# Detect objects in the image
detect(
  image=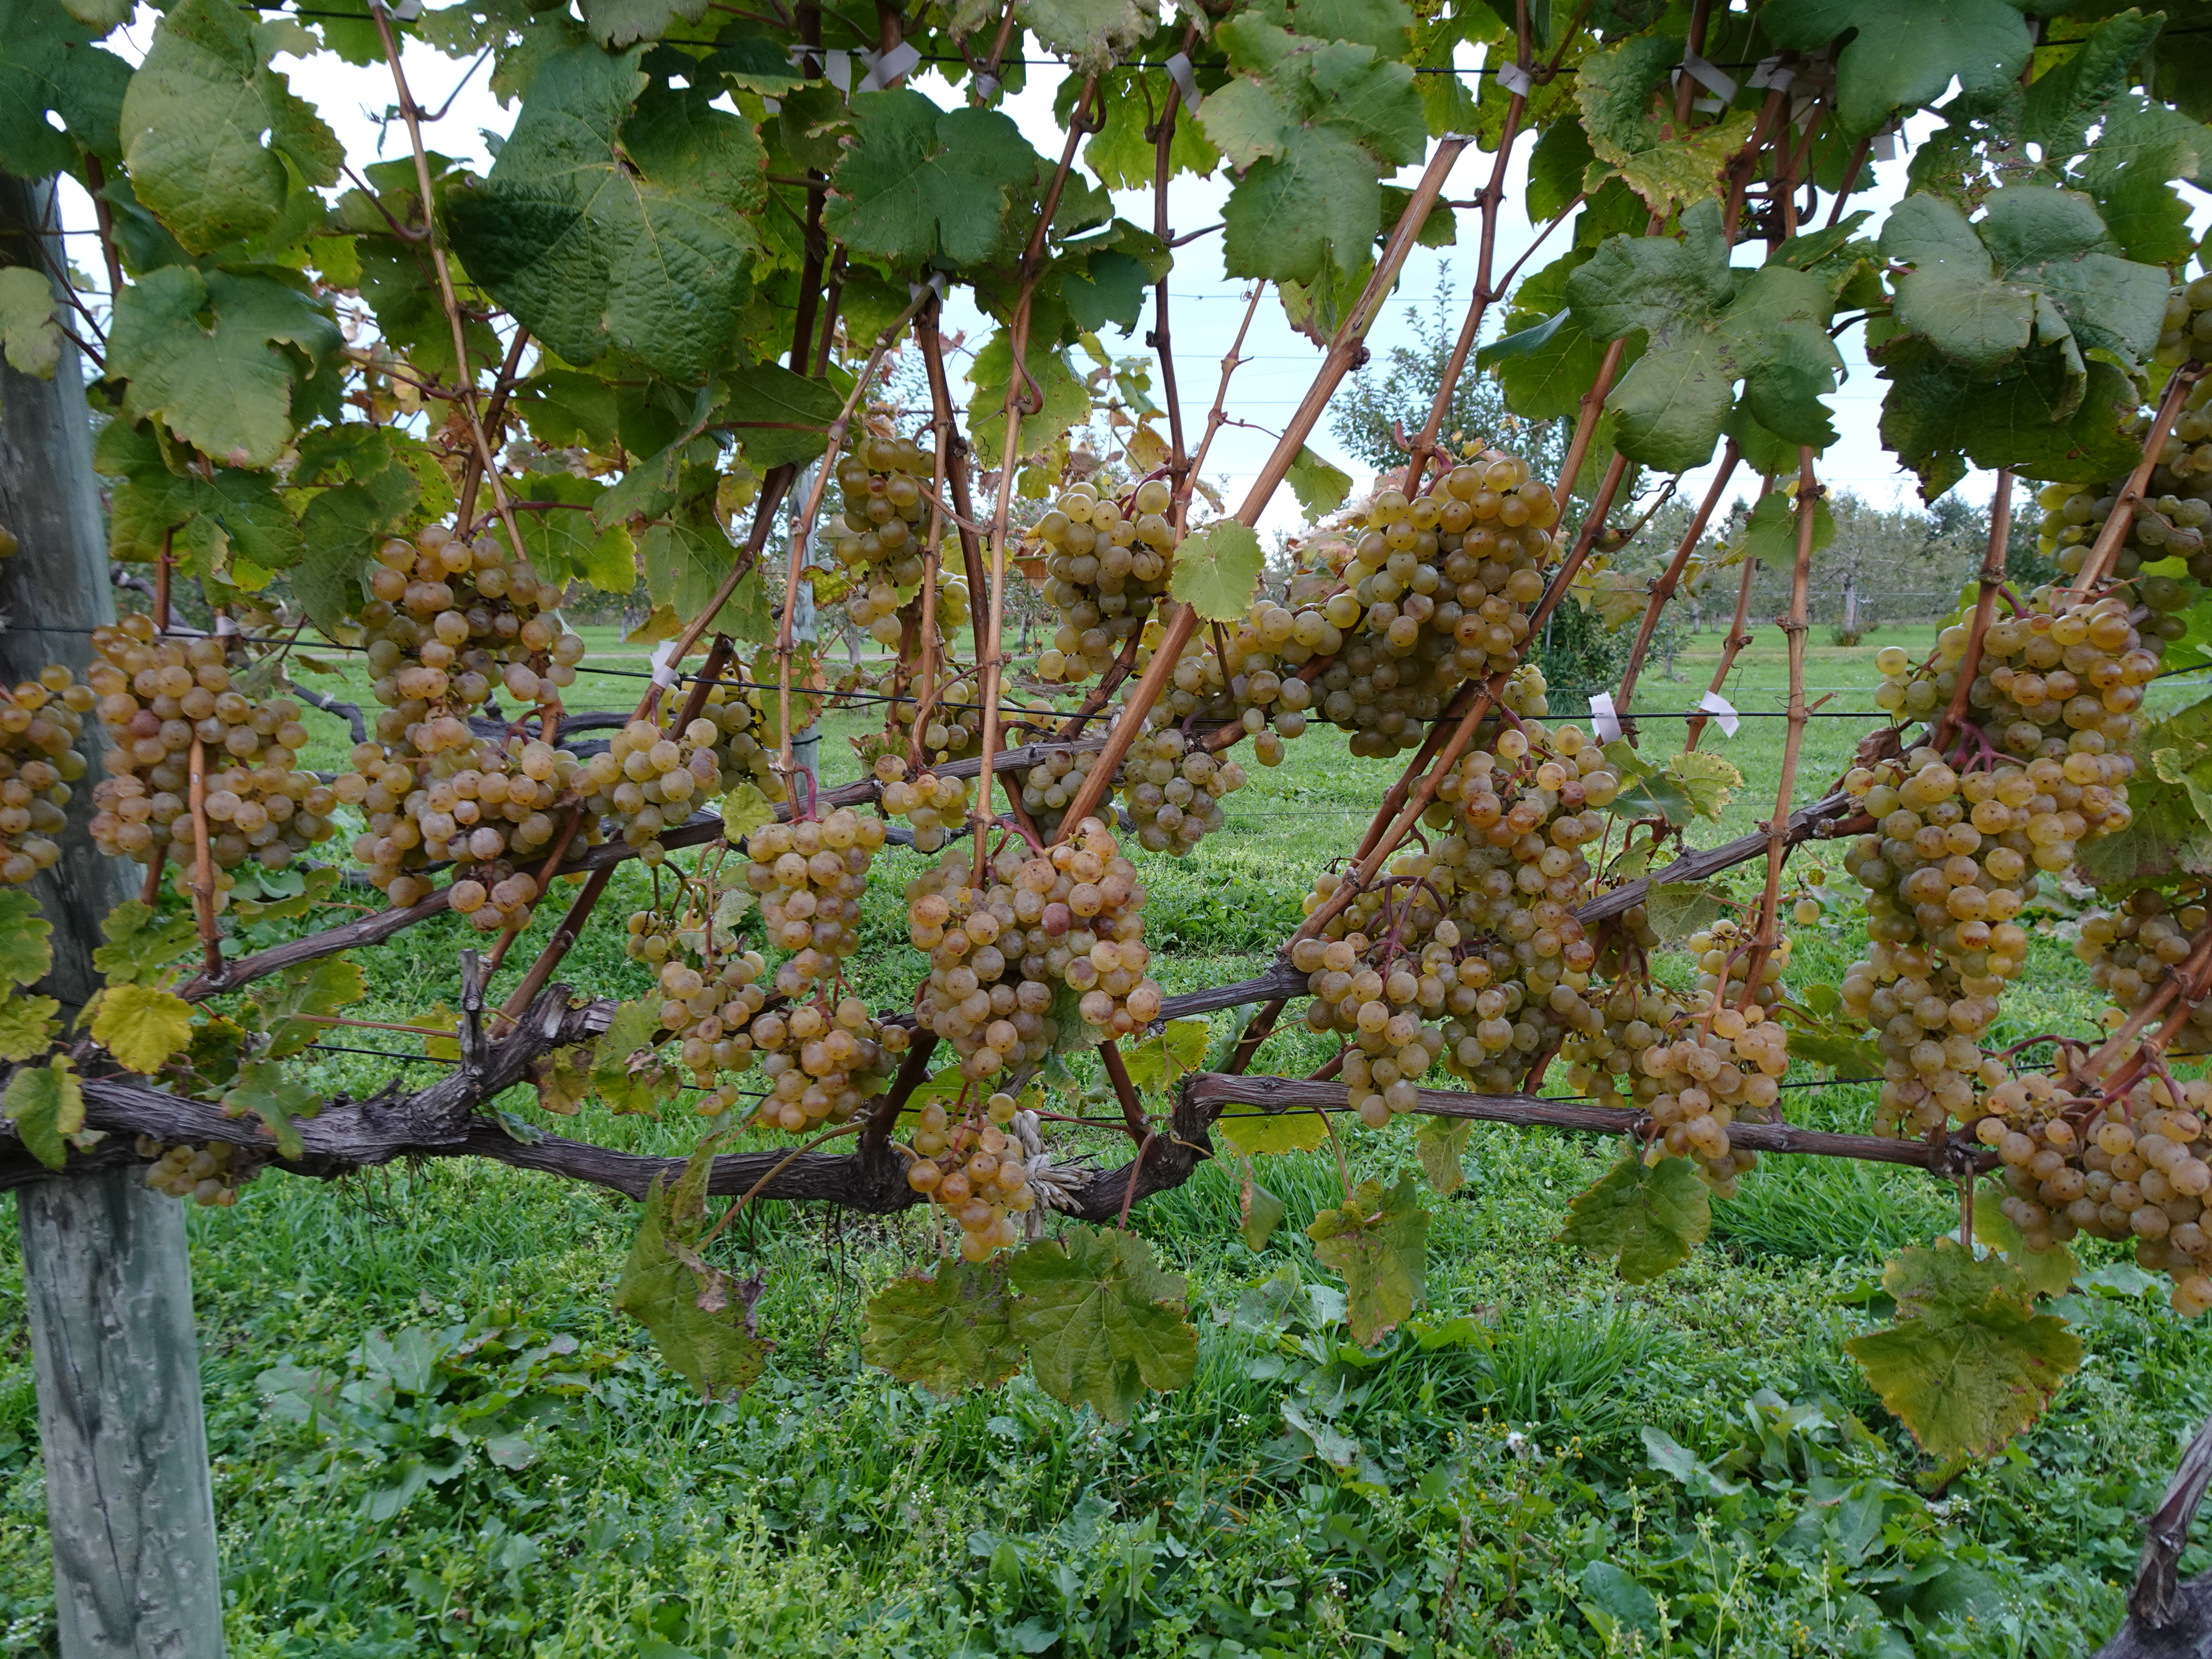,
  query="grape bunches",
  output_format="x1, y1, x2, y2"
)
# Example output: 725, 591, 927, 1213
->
413, 742, 578, 935
993, 817, 1184, 1037
1118, 678, 1251, 861
1286, 918, 1459, 1138
2070, 885, 2212, 1065
1547, 989, 1658, 1128
569, 714, 724, 870
1957, 587, 2163, 881
1443, 953, 1542, 1112
1295, 833, 1472, 933
364, 518, 594, 754
835, 433, 946, 644
903, 1087, 1041, 1265
1032, 477, 1186, 683
123, 1125, 245, 1215
1, 653, 98, 889
1643, 881, 1835, 1211
78, 606, 206, 859
1171, 571, 1365, 766
1840, 952, 2004, 1150
2148, 253, 2212, 479
2134, 1060, 2212, 1349
874, 656, 1023, 859
750, 999, 913, 1139
1328, 444, 1569, 757
926, 568, 971, 665
2029, 449, 2212, 636
653, 662, 794, 801
903, 848, 1065, 1078
743, 798, 892, 996
132, 635, 338, 922
1012, 696, 1112, 819
1838, 737, 2036, 1001
626, 904, 768, 1118
1861, 600, 1996, 727
1965, 1044, 2193, 1260
1400, 721, 1629, 1005
333, 737, 431, 907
